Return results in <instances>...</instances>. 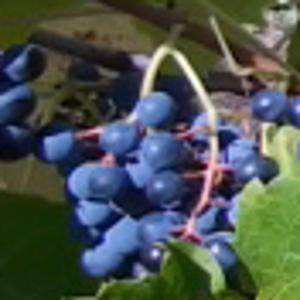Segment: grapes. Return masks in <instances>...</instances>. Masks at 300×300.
Masks as SVG:
<instances>
[{
  "label": "grapes",
  "instance_id": "1",
  "mask_svg": "<svg viewBox=\"0 0 300 300\" xmlns=\"http://www.w3.org/2000/svg\"><path fill=\"white\" fill-rule=\"evenodd\" d=\"M48 69L46 49L11 45L0 55V159L33 155L58 166L70 202V232L84 246L76 254L89 280L137 278L164 267L172 239L200 244L224 271L238 266L233 209L238 193L256 178L271 184L278 163L261 158V145L217 115L206 131L203 111L192 112L189 84L163 76L139 98L143 74L129 68L110 86L116 121L78 141L76 126L49 117L36 130L26 121L38 108L28 86Z\"/></svg>",
  "mask_w": 300,
  "mask_h": 300
},
{
  "label": "grapes",
  "instance_id": "2",
  "mask_svg": "<svg viewBox=\"0 0 300 300\" xmlns=\"http://www.w3.org/2000/svg\"><path fill=\"white\" fill-rule=\"evenodd\" d=\"M250 109L262 122L289 121L292 128L300 130V96L286 95L277 88H262L252 93Z\"/></svg>",
  "mask_w": 300,
  "mask_h": 300
}]
</instances>
